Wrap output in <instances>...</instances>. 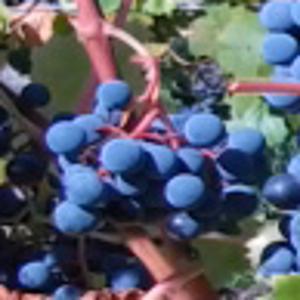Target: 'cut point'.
<instances>
[{"label": "cut point", "instance_id": "obj_1", "mask_svg": "<svg viewBox=\"0 0 300 300\" xmlns=\"http://www.w3.org/2000/svg\"><path fill=\"white\" fill-rule=\"evenodd\" d=\"M105 25L110 38L120 42L124 47L130 49L142 60L148 84L159 87L161 84V76L153 51L126 29L110 22H105Z\"/></svg>", "mask_w": 300, "mask_h": 300}]
</instances>
